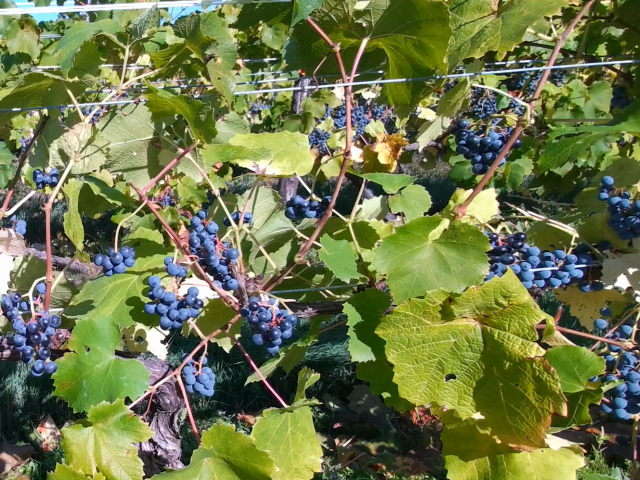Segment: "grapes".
<instances>
[{
	"instance_id": "grapes-1",
	"label": "grapes",
	"mask_w": 640,
	"mask_h": 480,
	"mask_svg": "<svg viewBox=\"0 0 640 480\" xmlns=\"http://www.w3.org/2000/svg\"><path fill=\"white\" fill-rule=\"evenodd\" d=\"M486 238L493 249L487 252L490 261V274L486 275L488 280H492L493 276L502 277L507 270V265H511V269L515 274H519L522 278L521 284L525 289H530L534 285L539 289H546L548 284L551 287H559L560 285H569L571 278L581 281L578 290L581 293H600L604 289V284L600 281L590 283L585 279L587 273L586 268H576V263H593L594 259L588 254H567L562 249L543 250L537 246H529L523 243L526 240L524 232L515 235H508L506 240L508 245H502L497 242L498 235L496 233H488ZM559 271H550L546 273H531V268H544L548 266H556L560 262Z\"/></svg>"
},
{
	"instance_id": "grapes-2",
	"label": "grapes",
	"mask_w": 640,
	"mask_h": 480,
	"mask_svg": "<svg viewBox=\"0 0 640 480\" xmlns=\"http://www.w3.org/2000/svg\"><path fill=\"white\" fill-rule=\"evenodd\" d=\"M1 307L6 315L10 318L11 327L18 333L12 337L13 349L20 352V358L24 363H32L36 350L34 344H38L39 357L32 365L31 376L33 378L42 376L45 372L52 375L57 370L55 361H45L52 355L49 348L52 345V337L55 329H59L62 325V317L59 314H52L45 310H40L37 314L36 321L25 323L19 317L20 309L24 313L31 311L30 303L22 301V296L18 292L4 294L2 296Z\"/></svg>"
},
{
	"instance_id": "grapes-3",
	"label": "grapes",
	"mask_w": 640,
	"mask_h": 480,
	"mask_svg": "<svg viewBox=\"0 0 640 480\" xmlns=\"http://www.w3.org/2000/svg\"><path fill=\"white\" fill-rule=\"evenodd\" d=\"M148 285L152 288L148 291V298L151 301L144 305V311L149 316H160V328L162 330H181L184 327L183 321H189L192 317H198L203 308V301L199 296L197 286H189L185 300L178 301L175 292H168L162 287V279L157 275H151Z\"/></svg>"
},
{
	"instance_id": "grapes-4",
	"label": "grapes",
	"mask_w": 640,
	"mask_h": 480,
	"mask_svg": "<svg viewBox=\"0 0 640 480\" xmlns=\"http://www.w3.org/2000/svg\"><path fill=\"white\" fill-rule=\"evenodd\" d=\"M208 218L209 210L207 208H202L198 212V216L191 218L194 230L189 235V250L193 255H198L200 265L206 266L205 271L208 275L214 277V284L219 289H224L225 291L237 289L239 282L231 277L229 263L218 258L216 242L219 225L214 221H210L208 225L202 224V219Z\"/></svg>"
},
{
	"instance_id": "grapes-5",
	"label": "grapes",
	"mask_w": 640,
	"mask_h": 480,
	"mask_svg": "<svg viewBox=\"0 0 640 480\" xmlns=\"http://www.w3.org/2000/svg\"><path fill=\"white\" fill-rule=\"evenodd\" d=\"M258 303V297H249V306H241L239 312L242 317H247L249 324L256 327L257 332L251 335L252 342L256 346L265 344L268 354L277 355L282 339L293 337L292 326L298 322V318L290 315L288 310L281 309V304L277 303L274 316L277 320L281 319L282 323L279 327H271L270 323L274 322L272 310L265 306L259 307Z\"/></svg>"
},
{
	"instance_id": "grapes-6",
	"label": "grapes",
	"mask_w": 640,
	"mask_h": 480,
	"mask_svg": "<svg viewBox=\"0 0 640 480\" xmlns=\"http://www.w3.org/2000/svg\"><path fill=\"white\" fill-rule=\"evenodd\" d=\"M468 126L469 120L460 118L458 124L453 127L457 151L463 153L465 160H471L472 172L475 175H483L505 146L509 135L491 129L487 136L479 138L474 131L468 130Z\"/></svg>"
},
{
	"instance_id": "grapes-7",
	"label": "grapes",
	"mask_w": 640,
	"mask_h": 480,
	"mask_svg": "<svg viewBox=\"0 0 640 480\" xmlns=\"http://www.w3.org/2000/svg\"><path fill=\"white\" fill-rule=\"evenodd\" d=\"M638 357L625 352L617 365V370L626 380L611 390L610 401L602 404V410L620 420H629L640 412V373L635 370Z\"/></svg>"
},
{
	"instance_id": "grapes-8",
	"label": "grapes",
	"mask_w": 640,
	"mask_h": 480,
	"mask_svg": "<svg viewBox=\"0 0 640 480\" xmlns=\"http://www.w3.org/2000/svg\"><path fill=\"white\" fill-rule=\"evenodd\" d=\"M604 184L598 193V199L608 203L611 212L607 224L617 231V237L625 241L640 237V199L631 205L629 190H623L618 195L609 196L614 189V177L612 175L602 178Z\"/></svg>"
},
{
	"instance_id": "grapes-9",
	"label": "grapes",
	"mask_w": 640,
	"mask_h": 480,
	"mask_svg": "<svg viewBox=\"0 0 640 480\" xmlns=\"http://www.w3.org/2000/svg\"><path fill=\"white\" fill-rule=\"evenodd\" d=\"M193 357L190 358L183 369L184 391L188 394L199 393L201 396L213 397L215 395L216 375L209 367H203L201 374L193 366Z\"/></svg>"
},
{
	"instance_id": "grapes-10",
	"label": "grapes",
	"mask_w": 640,
	"mask_h": 480,
	"mask_svg": "<svg viewBox=\"0 0 640 480\" xmlns=\"http://www.w3.org/2000/svg\"><path fill=\"white\" fill-rule=\"evenodd\" d=\"M135 250L132 247H121L117 252L109 248L107 254H97L93 258L95 266H103L105 275L112 277L117 273H125L128 267L135 265Z\"/></svg>"
},
{
	"instance_id": "grapes-11",
	"label": "grapes",
	"mask_w": 640,
	"mask_h": 480,
	"mask_svg": "<svg viewBox=\"0 0 640 480\" xmlns=\"http://www.w3.org/2000/svg\"><path fill=\"white\" fill-rule=\"evenodd\" d=\"M330 195L318 200H306L305 196L294 195L287 201L285 216L292 219H321L329 203Z\"/></svg>"
},
{
	"instance_id": "grapes-12",
	"label": "grapes",
	"mask_w": 640,
	"mask_h": 480,
	"mask_svg": "<svg viewBox=\"0 0 640 480\" xmlns=\"http://www.w3.org/2000/svg\"><path fill=\"white\" fill-rule=\"evenodd\" d=\"M58 176L59 170L57 168H53L49 172H43L40 168L33 171V180L38 189H44L46 185L55 187L58 183Z\"/></svg>"
},
{
	"instance_id": "grapes-13",
	"label": "grapes",
	"mask_w": 640,
	"mask_h": 480,
	"mask_svg": "<svg viewBox=\"0 0 640 480\" xmlns=\"http://www.w3.org/2000/svg\"><path fill=\"white\" fill-rule=\"evenodd\" d=\"M163 264L169 275H175L177 278H185L187 276V268L185 266L175 265L174 258L167 256L163 259Z\"/></svg>"
},
{
	"instance_id": "grapes-14",
	"label": "grapes",
	"mask_w": 640,
	"mask_h": 480,
	"mask_svg": "<svg viewBox=\"0 0 640 480\" xmlns=\"http://www.w3.org/2000/svg\"><path fill=\"white\" fill-rule=\"evenodd\" d=\"M223 246L226 248L222 251V256L224 258L232 259L231 264L236 265L238 261L237 256L240 255L238 248H232L228 240L223 241Z\"/></svg>"
},
{
	"instance_id": "grapes-15",
	"label": "grapes",
	"mask_w": 640,
	"mask_h": 480,
	"mask_svg": "<svg viewBox=\"0 0 640 480\" xmlns=\"http://www.w3.org/2000/svg\"><path fill=\"white\" fill-rule=\"evenodd\" d=\"M599 357L606 359V361H607L606 370L607 371H611V370L614 369V365L617 363V359L614 357L613 354L600 352L599 353Z\"/></svg>"
},
{
	"instance_id": "grapes-16",
	"label": "grapes",
	"mask_w": 640,
	"mask_h": 480,
	"mask_svg": "<svg viewBox=\"0 0 640 480\" xmlns=\"http://www.w3.org/2000/svg\"><path fill=\"white\" fill-rule=\"evenodd\" d=\"M230 214H231L232 218L234 219L235 224H238L240 222L241 217H242V213L241 212L231 211Z\"/></svg>"
}]
</instances>
